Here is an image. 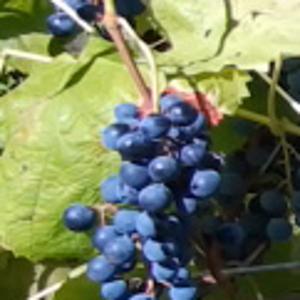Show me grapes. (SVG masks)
<instances>
[{"label": "grapes", "instance_id": "grapes-1", "mask_svg": "<svg viewBox=\"0 0 300 300\" xmlns=\"http://www.w3.org/2000/svg\"><path fill=\"white\" fill-rule=\"evenodd\" d=\"M101 140L123 162L119 176L100 185L109 205L123 204L113 224L97 226V214L77 201L61 209L59 222L70 235H91L97 256L85 275L98 285L103 300H154L148 291H128L123 274L134 268L140 242L148 273L169 300H196L198 282L186 269L194 254L191 239L214 235L228 259H246L252 239L279 245L294 239L296 226L284 216L283 195L251 185L252 156L245 149L219 158L209 153L208 137L200 135L204 113L176 93L161 97L160 110L142 115L136 103L113 110Z\"/></svg>", "mask_w": 300, "mask_h": 300}, {"label": "grapes", "instance_id": "grapes-3", "mask_svg": "<svg viewBox=\"0 0 300 300\" xmlns=\"http://www.w3.org/2000/svg\"><path fill=\"white\" fill-rule=\"evenodd\" d=\"M64 4L77 14L87 23H93L103 14V5L87 0H64Z\"/></svg>", "mask_w": 300, "mask_h": 300}, {"label": "grapes", "instance_id": "grapes-2", "mask_svg": "<svg viewBox=\"0 0 300 300\" xmlns=\"http://www.w3.org/2000/svg\"><path fill=\"white\" fill-rule=\"evenodd\" d=\"M45 27L48 33L54 37H67L73 34L76 22L67 13L60 10H53L46 17Z\"/></svg>", "mask_w": 300, "mask_h": 300}]
</instances>
